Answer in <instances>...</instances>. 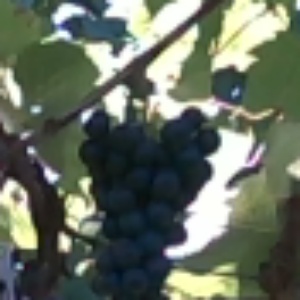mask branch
<instances>
[{
	"label": "branch",
	"mask_w": 300,
	"mask_h": 300,
	"mask_svg": "<svg viewBox=\"0 0 300 300\" xmlns=\"http://www.w3.org/2000/svg\"><path fill=\"white\" fill-rule=\"evenodd\" d=\"M215 4L216 0L203 1L173 31L160 37L156 44L139 57L130 60L127 67L119 70L109 81L62 111L54 122L27 139L22 140L19 133L7 132L3 122H0V192L5 188L8 178L16 180L30 198L33 220L38 230V259L27 267L20 286V296L24 300H41L59 274L57 231L63 221L62 199L56 187L46 179L42 165L27 149L75 121L78 113L121 84L125 85L129 94L134 97L152 94L154 83L148 78L145 67L163 54L170 43L186 33Z\"/></svg>",
	"instance_id": "obj_1"
}]
</instances>
